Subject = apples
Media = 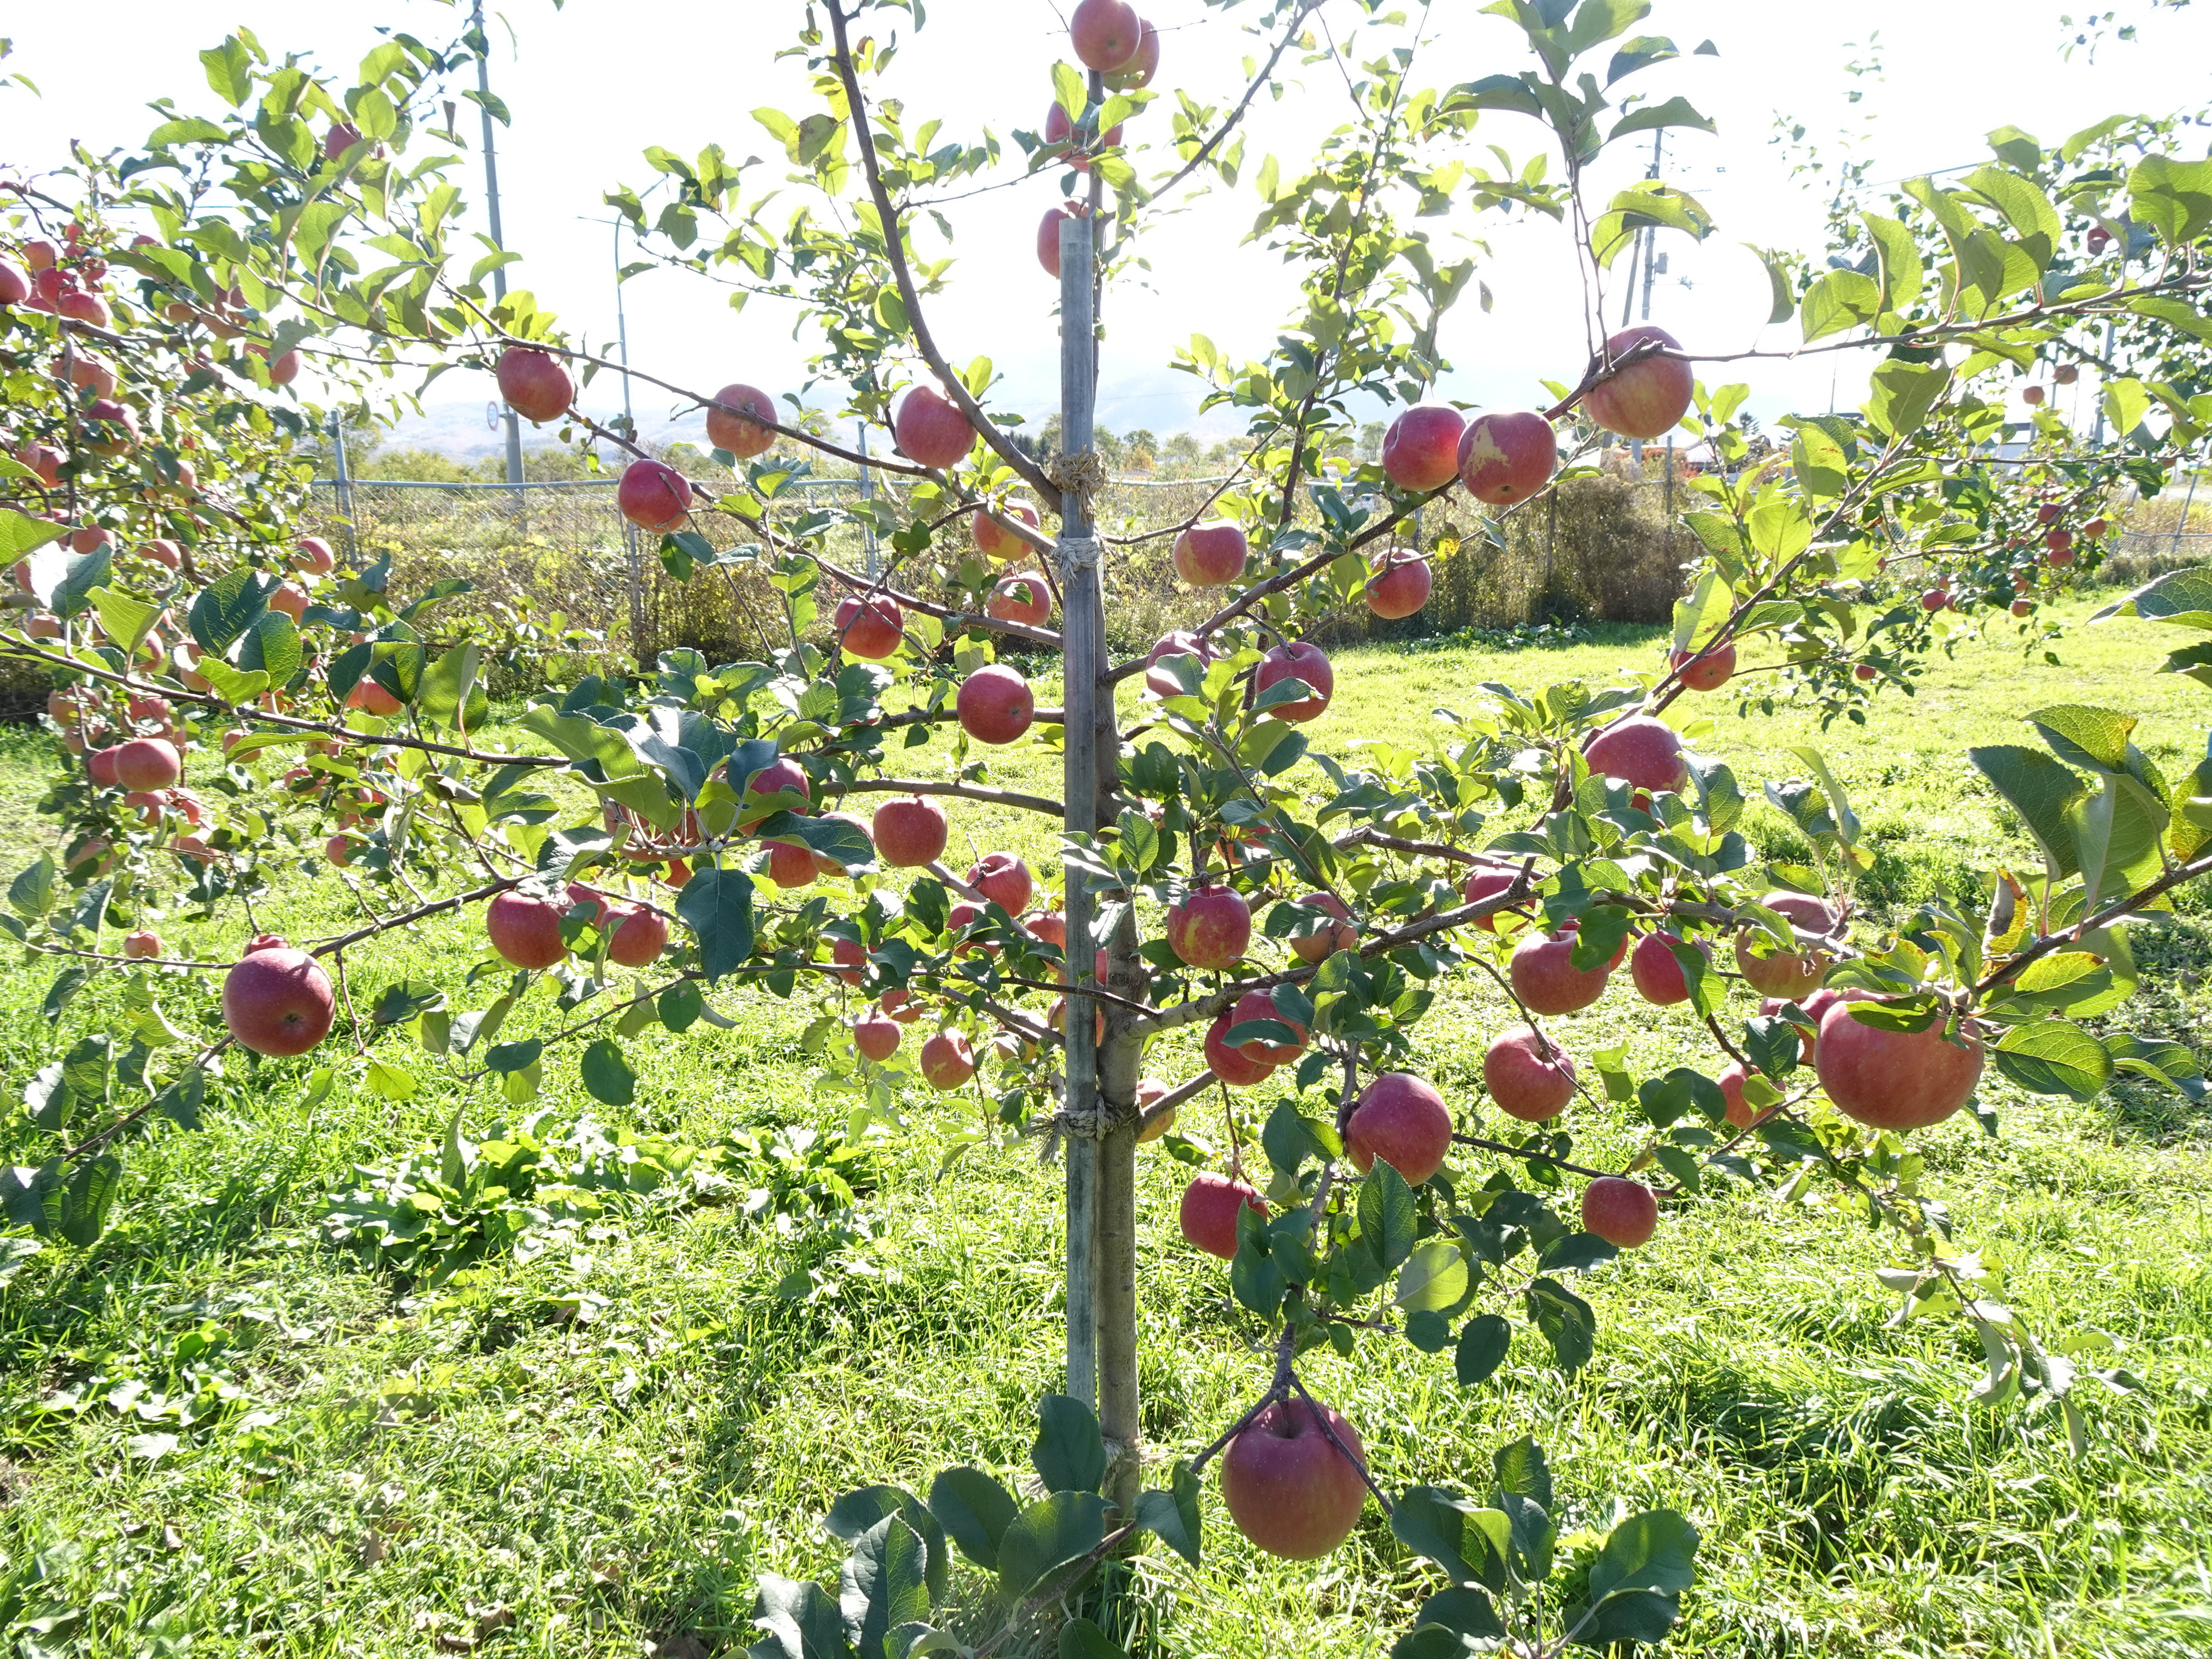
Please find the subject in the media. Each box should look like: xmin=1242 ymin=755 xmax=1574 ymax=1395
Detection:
xmin=996 ymin=1009 xmax=1048 ymax=1064
xmin=972 ymin=497 xmax=1040 ymax=561
xmin=1670 ymin=636 xmax=1736 ymax=691
xmin=1103 ymin=17 xmax=1159 ymax=89
xmin=600 ymin=901 xmax=668 ymax=967
xmin=487 ymin=887 xmax=576 ymax=969
xmin=1382 ymin=400 xmax=1468 ymax=492
xmin=496 ymin=345 xmax=575 ymax=422
xmin=1136 ymin=1078 xmax=1176 ymax=1142
xmin=759 ymin=839 xmax=819 ymax=887
xmin=1289 ymin=890 xmax=1359 ymax=963
xmin=1582 ymin=1176 xmax=1657 ymax=1248
xmin=1812 ymin=987 xmax=1983 ymax=1130
xmin=655 ymin=859 xmax=692 ymax=888
xmin=1167 ymin=884 xmax=1251 ymax=969
xmin=810 ymin=811 xmax=876 ymax=876
xmin=324 ymin=123 xmax=386 ymax=172
xmin=957 ymin=664 xmax=1034 ymax=745
xmin=1204 ymin=1008 xmax=1276 ymax=1086
xmin=1173 ymin=518 xmax=1247 ymax=586
xmin=1070 ymin=0 xmax=1141 ymax=71
xmin=1716 ymin=1056 xmax=1785 ymax=1129
xmin=1346 ymin=1072 xmax=1452 ymax=1188
xmin=895 ymin=383 xmax=977 ymax=466
xmin=848 ymin=696 xmax=878 ymax=724
xmin=1221 ymin=1399 xmax=1368 ymax=1559
xmin=966 ymin=851 xmax=1032 ymax=917
xmin=1365 ymin=547 xmax=1432 ymax=619
xmin=618 ymin=459 xmax=692 ymax=534
xmin=706 ymin=384 xmax=777 ymax=459
xmin=562 ymin=881 xmax=611 ymax=928
xmin=833 ymin=938 xmax=877 ymax=987
xmin=834 ymin=593 xmax=903 ymax=659
xmin=873 ymin=796 xmax=947 ymax=867
xmin=1581 ymin=327 xmax=1693 ymax=438
xmin=1483 ymin=1027 xmax=1575 ymax=1121
xmin=1024 ymin=908 xmax=1066 ymax=972
xmin=854 ymin=1010 xmax=901 ymax=1061
xmin=1095 ymin=949 xmax=1107 ymax=985
xmin=1149 ymin=808 xmax=1165 ymax=831
xmin=1215 ymin=825 xmax=1270 ymax=864
xmin=222 ymin=948 xmax=336 ymax=1056
xmin=603 ymin=802 xmax=678 ymax=862
xmin=1510 ymin=930 xmax=1611 ymax=1015
xmin=1457 ymin=412 xmax=1557 ymax=504
xmin=1057 ymin=969 xmax=1065 ymax=1001
xmin=1254 ymin=641 xmax=1333 ymax=723
xmin=920 ymin=1027 xmax=974 ymax=1090
xmin=1231 ymin=989 xmax=1310 ymax=1065
xmin=1557 ymin=913 xmax=1628 ymax=972
xmin=1631 ymin=930 xmax=1711 ymax=1005
xmin=1735 ymin=891 xmax=1837 ymax=999
xmin=946 ymin=901 xmax=1001 ymax=959
xmin=1037 ymin=199 xmax=1088 ymax=279
xmin=736 ymin=758 xmax=809 ymax=836
xmin=1047 ymin=995 xmax=1103 ymax=1047
xmin=655 ymin=808 xmax=700 ymax=847
xmin=1146 ymin=630 xmax=1220 ymax=698
xmin=1046 ymin=101 xmax=1123 ymax=173
xmin=1582 ymin=715 xmax=1687 ymax=820
xmin=1465 ymin=867 xmax=1536 ymax=934
xmin=987 ymin=570 xmax=1053 ymax=627
xmin=1180 ymin=1171 xmax=1267 ymax=1260
xmin=1758 ymin=987 xmax=1837 ymax=1063
xmin=881 ymin=989 xmax=923 ymax=1023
